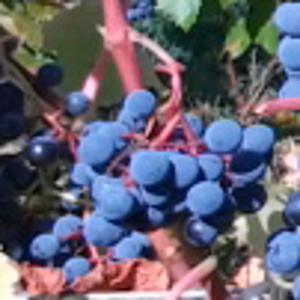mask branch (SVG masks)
Here are the masks:
<instances>
[{"label":"branch","instance_id":"branch-1","mask_svg":"<svg viewBox=\"0 0 300 300\" xmlns=\"http://www.w3.org/2000/svg\"><path fill=\"white\" fill-rule=\"evenodd\" d=\"M103 44L120 77L124 92L138 90L142 86L136 63L134 42L129 38L131 22L126 0H101Z\"/></svg>","mask_w":300,"mask_h":300}]
</instances>
